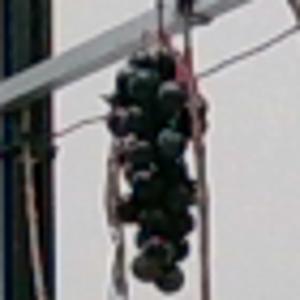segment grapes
I'll use <instances>...</instances> for the list:
<instances>
[{"instance_id": "obj_1", "label": "grapes", "mask_w": 300, "mask_h": 300, "mask_svg": "<svg viewBox=\"0 0 300 300\" xmlns=\"http://www.w3.org/2000/svg\"><path fill=\"white\" fill-rule=\"evenodd\" d=\"M115 91L105 118L109 135L123 140L113 153L132 190L120 195L115 219L135 224L140 251L129 269L142 283L153 282L164 294L180 291L185 277L179 265L191 251L186 238L197 226L189 211L202 197L200 182L189 177L185 152L192 137L209 129V104L197 90V78L177 72L175 56L165 49L134 50L129 66L115 77Z\"/></svg>"}]
</instances>
